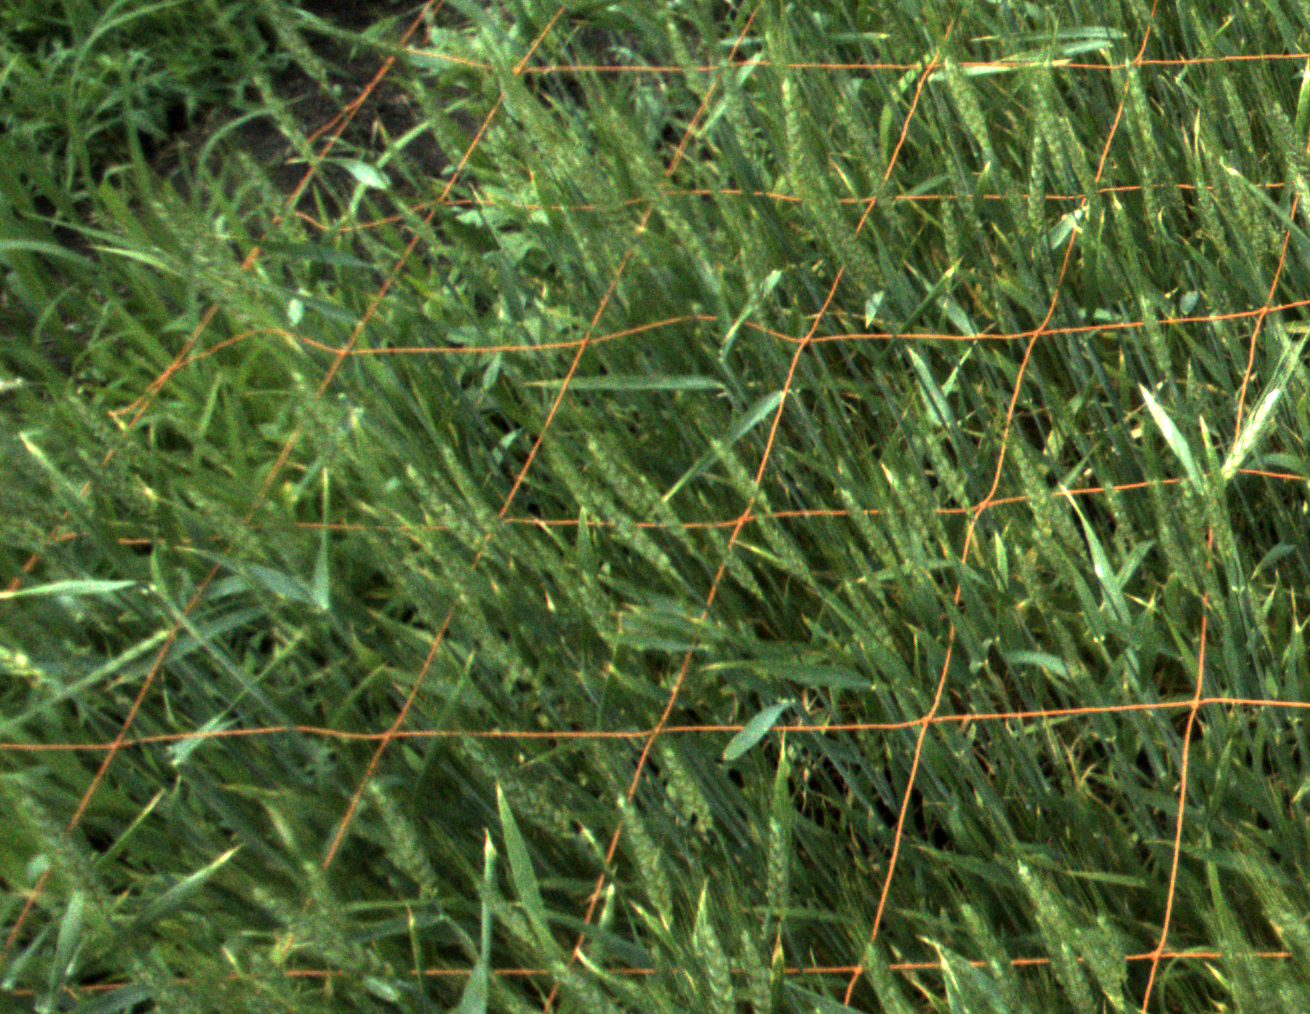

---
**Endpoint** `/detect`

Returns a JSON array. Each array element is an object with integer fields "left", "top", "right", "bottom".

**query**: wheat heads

[
  {"left": 190, "top": 967, "right": 241, "bottom": 1014},
  {"left": 61, "top": 396, "right": 155, "bottom": 467},
  {"left": 1033, "top": 910, "right": 1071, "bottom": 1000},
  {"left": 1218, "top": 295, "right": 1235, "bottom": 327},
  {"left": 832, "top": 209, "right": 887, "bottom": 290},
  {"left": 1288, "top": 0, "right": 1310, "bottom": 41},
  {"left": 450, "top": 234, "right": 489, "bottom": 276},
  {"left": 636, "top": 475, "right": 693, "bottom": 551},
  {"left": 289, "top": 368, "right": 359, "bottom": 464},
  {"left": 560, "top": 203, "right": 596, "bottom": 277},
  {"left": 846, "top": 540, "right": 887, "bottom": 603},
  {"left": 0, "top": 485, "right": 65, "bottom": 524},
  {"left": 549, "top": 956, "right": 678, "bottom": 1014},
  {"left": 1206, "top": 499, "right": 1231, "bottom": 551},
  {"left": 590, "top": 492, "right": 679, "bottom": 578},
  {"left": 1123, "top": 106, "right": 1146, "bottom": 168},
  {"left": 1231, "top": 186, "right": 1261, "bottom": 264},
  {"left": 990, "top": 269, "right": 1013, "bottom": 346},
  {"left": 865, "top": 168, "right": 904, "bottom": 229},
  {"left": 258, "top": 213, "right": 313, "bottom": 294},
  {"left": 409, "top": 77, "right": 468, "bottom": 170},
  {"left": 762, "top": 833, "right": 778, "bottom": 904},
  {"left": 258, "top": 0, "right": 329, "bottom": 84},
  {"left": 427, "top": 540, "right": 482, "bottom": 619},
  {"left": 887, "top": 983, "right": 933, "bottom": 1014},
  {"left": 907, "top": 481, "right": 947, "bottom": 545},
  {"left": 385, "top": 561, "right": 433, "bottom": 626},
  {"left": 1137, "top": 120, "right": 1187, "bottom": 215},
  {"left": 459, "top": 735, "right": 578, "bottom": 841},
  {"left": 666, "top": 22, "right": 705, "bottom": 95},
  {"left": 958, "top": 899, "right": 1024, "bottom": 989},
  {"left": 990, "top": 952, "right": 1016, "bottom": 1005},
  {"left": 739, "top": 223, "right": 757, "bottom": 260},
  {"left": 487, "top": 126, "right": 523, "bottom": 193},
  {"left": 628, "top": 162, "right": 710, "bottom": 274},
  {"left": 299, "top": 857, "right": 350, "bottom": 931},
  {"left": 294, "top": 403, "right": 348, "bottom": 490},
  {"left": 482, "top": 632, "right": 535, "bottom": 683},
  {"left": 1122, "top": 54, "right": 1152, "bottom": 135},
  {"left": 919, "top": 82, "right": 936, "bottom": 122},
  {"left": 704, "top": 524, "right": 767, "bottom": 599},
  {"left": 1102, "top": 478, "right": 1137, "bottom": 545},
  {"left": 1244, "top": 579, "right": 1265, "bottom": 628},
  {"left": 543, "top": 438, "right": 598, "bottom": 522},
  {"left": 1051, "top": 614, "right": 1080, "bottom": 666},
  {"left": 1031, "top": 82, "right": 1069, "bottom": 196},
  {"left": 0, "top": 643, "right": 49, "bottom": 683},
  {"left": 688, "top": 192, "right": 702, "bottom": 224},
  {"left": 1253, "top": 215, "right": 1270, "bottom": 255},
  {"left": 1041, "top": 0, "right": 1072, "bottom": 28},
  {"left": 560, "top": 631, "right": 581, "bottom": 667},
  {"left": 1179, "top": 476, "right": 1204, "bottom": 545},
  {"left": 695, "top": 919, "right": 740, "bottom": 1014},
  {"left": 1287, "top": 160, "right": 1310, "bottom": 263},
  {"left": 432, "top": 468, "right": 474, "bottom": 518},
  {"left": 396, "top": 198, "right": 443, "bottom": 250},
  {"left": 719, "top": 57, "right": 758, "bottom": 161},
  {"left": 1227, "top": 979, "right": 1262, "bottom": 1014},
  {"left": 1159, "top": 518, "right": 1198, "bottom": 593},
  {"left": 1074, "top": 929, "right": 1126, "bottom": 1011},
  {"left": 252, "top": 77, "right": 306, "bottom": 152},
  {"left": 736, "top": 247, "right": 767, "bottom": 322},
  {"left": 1214, "top": 934, "right": 1249, "bottom": 984},
  {"left": 1276, "top": 322, "right": 1309, "bottom": 385},
  {"left": 366, "top": 779, "right": 440, "bottom": 894},
  {"left": 882, "top": 506, "right": 912, "bottom": 561},
  {"left": 1202, "top": 77, "right": 1225, "bottom": 126},
  {"left": 1100, "top": 250, "right": 1129, "bottom": 293},
  {"left": 236, "top": 561, "right": 281, "bottom": 624},
  {"left": 437, "top": 439, "right": 486, "bottom": 513},
  {"left": 247, "top": 948, "right": 303, "bottom": 1008},
  {"left": 1013, "top": 443, "right": 1051, "bottom": 534},
  {"left": 944, "top": 56, "right": 993, "bottom": 150},
  {"left": 1000, "top": 166, "right": 1029, "bottom": 236},
  {"left": 249, "top": 886, "right": 399, "bottom": 982},
  {"left": 661, "top": 740, "right": 715, "bottom": 834},
  {"left": 1187, "top": 3, "right": 1214, "bottom": 55},
  {"left": 608, "top": 106, "right": 666, "bottom": 181},
  {"left": 1013, "top": 544, "right": 1045, "bottom": 612},
  {"left": 710, "top": 438, "right": 772, "bottom": 513},
  {"left": 17, "top": 797, "right": 118, "bottom": 909},
  {"left": 944, "top": 155, "right": 985, "bottom": 243},
  {"left": 740, "top": 928, "right": 772, "bottom": 1014},
  {"left": 556, "top": 149, "right": 642, "bottom": 256},
  {"left": 1096, "top": 910, "right": 1127, "bottom": 984},
  {"left": 1030, "top": 528, "right": 1077, "bottom": 587},
  {"left": 1272, "top": 99, "right": 1310, "bottom": 183},
  {"left": 896, "top": 481, "right": 931, "bottom": 545},
  {"left": 756, "top": 515, "right": 810, "bottom": 581},
  {"left": 832, "top": 102, "right": 882, "bottom": 167},
  {"left": 1124, "top": 0, "right": 1159, "bottom": 34},
  {"left": 1142, "top": 164, "right": 1158, "bottom": 229},
  {"left": 1192, "top": 546, "right": 1227, "bottom": 616},
  {"left": 764, "top": 28, "right": 782, "bottom": 66},
  {"left": 1222, "top": 75, "right": 1255, "bottom": 155},
  {"left": 842, "top": 575, "right": 902, "bottom": 660},
  {"left": 808, "top": 203, "right": 864, "bottom": 286},
  {"left": 1057, "top": 116, "right": 1100, "bottom": 202},
  {"left": 586, "top": 434, "right": 655, "bottom": 518},
  {"left": 1240, "top": 942, "right": 1278, "bottom": 1014},
  {"left": 612, "top": 788, "right": 676, "bottom": 927},
  {"left": 134, "top": 960, "right": 225, "bottom": 1014},
  {"left": 148, "top": 199, "right": 195, "bottom": 258},
  {"left": 471, "top": 880, "right": 536, "bottom": 947},
  {"left": 926, "top": 428, "right": 973, "bottom": 518},
  {"left": 940, "top": 942, "right": 967, "bottom": 975},
  {"left": 193, "top": 253, "right": 282, "bottom": 307},
  {"left": 514, "top": 104, "right": 557, "bottom": 171},
  {"left": 403, "top": 465, "right": 507, "bottom": 566},
  {"left": 1222, "top": 388, "right": 1284, "bottom": 478},
  {"left": 1110, "top": 203, "right": 1132, "bottom": 264},
  {"left": 766, "top": 812, "right": 792, "bottom": 910},
  {"left": 475, "top": 503, "right": 543, "bottom": 569},
  {"left": 872, "top": 0, "right": 909, "bottom": 53},
  {"left": 524, "top": 0, "right": 564, "bottom": 38},
  {"left": 1135, "top": 293, "right": 1174, "bottom": 374},
  {"left": 1014, "top": 857, "right": 1081, "bottom": 950},
  {"left": 73, "top": 448, "right": 158, "bottom": 515},
  {"left": 865, "top": 940, "right": 905, "bottom": 1014},
  {"left": 1050, "top": 501, "right": 1088, "bottom": 557},
  {"left": 1266, "top": 220, "right": 1289, "bottom": 268},
  {"left": 488, "top": 0, "right": 525, "bottom": 15},
  {"left": 520, "top": 621, "right": 548, "bottom": 663},
  {"left": 0, "top": 514, "right": 64, "bottom": 557},
  {"left": 577, "top": 583, "right": 607, "bottom": 634},
  {"left": 241, "top": 152, "right": 308, "bottom": 239},
  {"left": 1049, "top": 382, "right": 1078, "bottom": 438},
  {"left": 1205, "top": 149, "right": 1225, "bottom": 206},
  {"left": 941, "top": 200, "right": 963, "bottom": 263},
  {"left": 1272, "top": 906, "right": 1310, "bottom": 1014},
  {"left": 184, "top": 485, "right": 267, "bottom": 559},
  {"left": 1196, "top": 176, "right": 1231, "bottom": 257},
  {"left": 533, "top": 535, "right": 581, "bottom": 593},
  {"left": 1026, "top": 135, "right": 1047, "bottom": 235},
  {"left": 1059, "top": 940, "right": 1100, "bottom": 1014},
  {"left": 836, "top": 489, "right": 899, "bottom": 572},
  {"left": 1125, "top": 0, "right": 1142, "bottom": 25},
  {"left": 1244, "top": 0, "right": 1268, "bottom": 44},
  {"left": 779, "top": 75, "right": 810, "bottom": 194},
  {"left": 150, "top": 245, "right": 261, "bottom": 336},
  {"left": 578, "top": 569, "right": 618, "bottom": 609},
  {"left": 1274, "top": 989, "right": 1310, "bottom": 1014}
]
